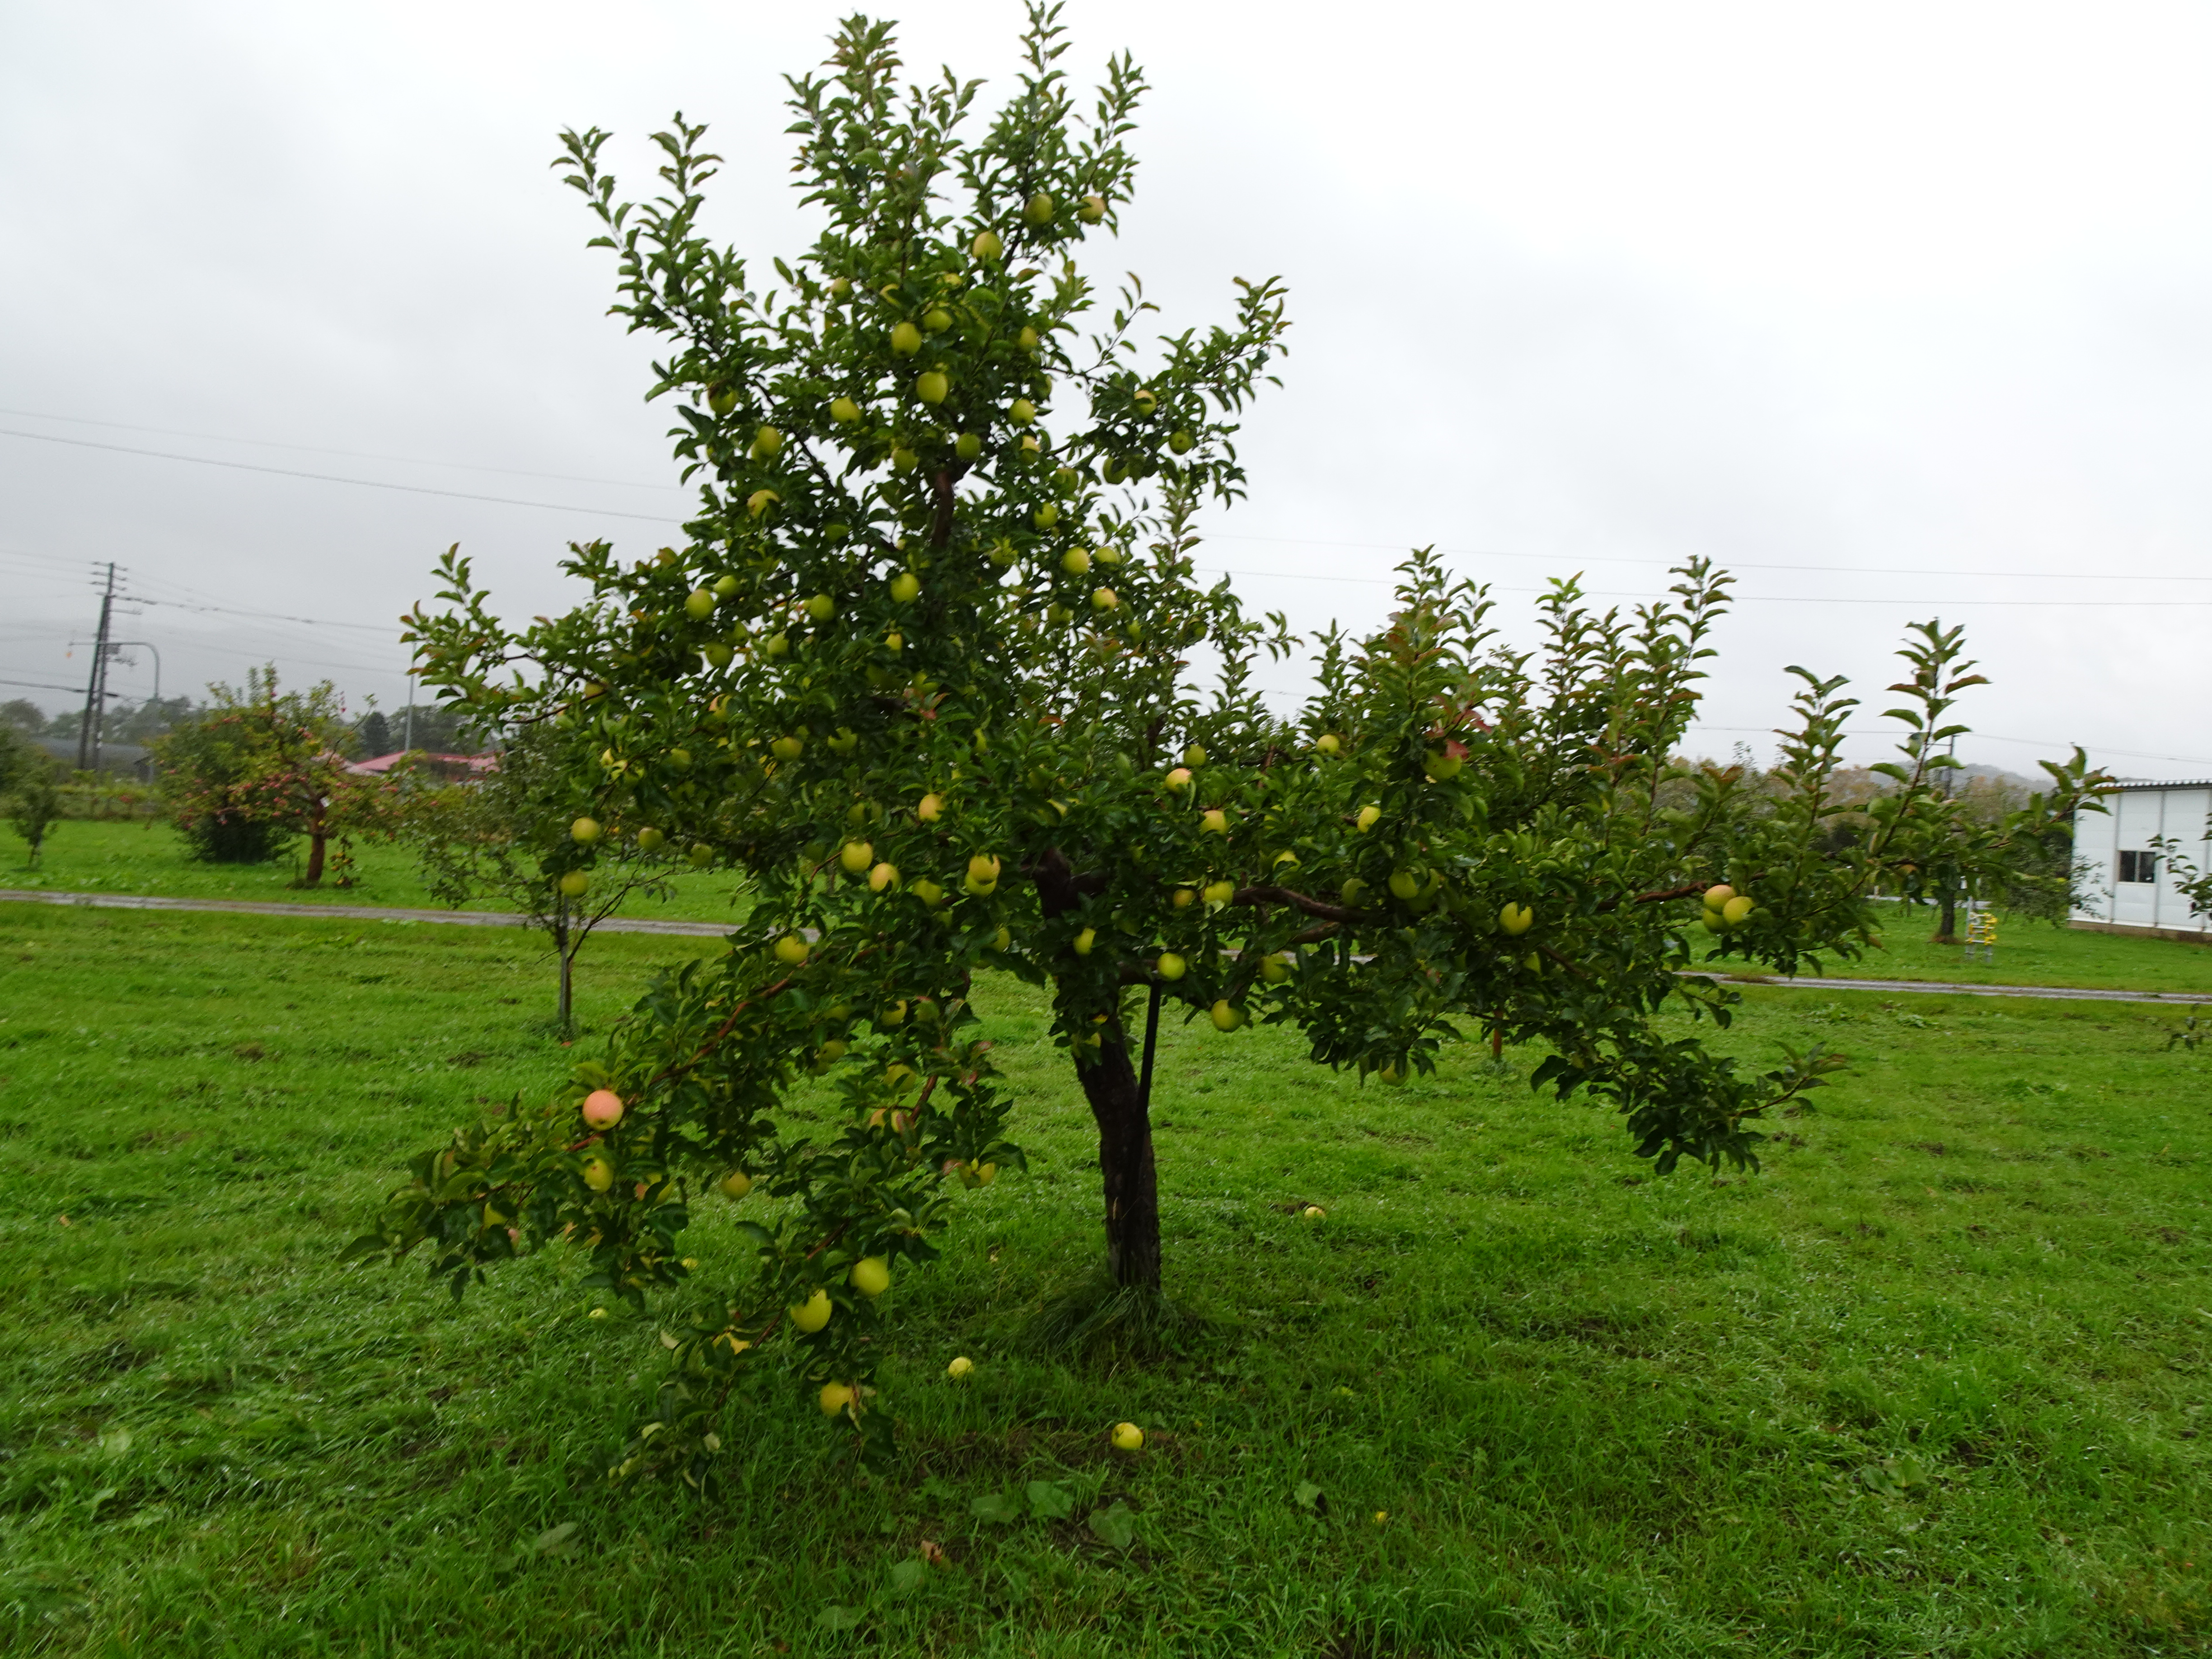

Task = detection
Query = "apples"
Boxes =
[841,837,873,873]
[1441,883,1469,911]
[1272,850,1302,872]
[706,642,733,668]
[847,797,883,826]
[484,1202,508,1229]
[810,594,836,623]
[766,629,789,659]
[713,1326,751,1359]
[582,1089,623,1131]
[1024,194,1054,225]
[1020,325,1038,347]
[1183,744,1206,767]
[936,273,962,290]
[965,872,997,898]
[625,1266,641,1285]
[556,706,566,716]
[892,521,915,550]
[985,925,1010,952]
[639,826,664,851]
[579,1155,614,1193]
[916,995,932,1002]
[1421,748,1461,782]
[706,445,735,467]
[918,793,947,823]
[1342,878,1369,908]
[505,1226,521,1247]
[659,748,680,768]
[1134,390,1157,420]
[881,630,902,650]
[602,710,630,735]
[972,232,1003,261]
[890,572,920,606]
[1048,601,1075,628]
[1057,468,1079,493]
[1420,868,1438,897]
[570,816,600,847]
[1498,901,1533,936]
[829,279,853,302]
[1090,546,1118,565]
[1008,398,1035,427]
[1165,768,1193,793]
[830,396,860,428]
[1169,431,1191,455]
[747,489,780,519]
[803,599,812,611]
[1427,889,1449,916]
[1406,893,1431,918]
[967,852,1000,885]
[1091,588,1116,616]
[1070,1031,1101,1059]
[869,862,900,897]
[751,444,768,468]
[814,1054,830,1075]
[916,371,949,405]
[1703,884,1738,914]
[1073,926,1096,956]
[1034,502,1058,529]
[922,300,953,336]
[1261,952,1289,983]
[914,668,938,694]
[1316,734,1339,754]
[902,504,925,530]
[879,283,902,306]
[871,1107,902,1130]
[1187,615,1207,641]
[827,726,858,753]
[713,575,741,602]
[907,548,931,574]
[877,997,906,1026]
[913,878,943,909]
[1264,805,1284,829]
[756,426,781,457]
[721,1169,751,1200]
[1211,999,1245,1033]
[1702,909,1733,934]
[1127,620,1143,645]
[673,749,691,773]
[691,844,712,867]
[1174,889,1196,908]
[893,448,920,472]
[1060,547,1089,577]
[723,620,748,646]
[611,758,644,790]
[709,693,732,717]
[849,1257,890,1296]
[1078,196,1104,224]
[991,546,1010,566]
[1127,453,1146,478]
[1032,375,1051,400]
[775,937,810,965]
[565,1221,600,1248]
[708,382,736,415]
[824,525,849,542]
[788,1287,832,1334]
[1199,810,1229,837]
[793,725,817,748]
[1388,866,1421,899]
[960,1157,996,1188]
[819,1377,876,1419]
[685,589,716,621]
[1357,806,1381,833]
[1203,880,1234,908]
[770,736,803,763]
[600,747,628,774]
[1046,796,1080,816]
[891,322,921,359]
[956,432,981,460]
[636,1250,662,1279]
[1103,457,1126,484]
[559,871,590,899]
[820,1039,845,1063]
[888,1063,916,1091]
[820,993,851,1022]
[1157,952,1186,981]
[634,1173,672,1206]
[585,680,608,705]
[1020,435,1039,453]
[1723,896,1755,931]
